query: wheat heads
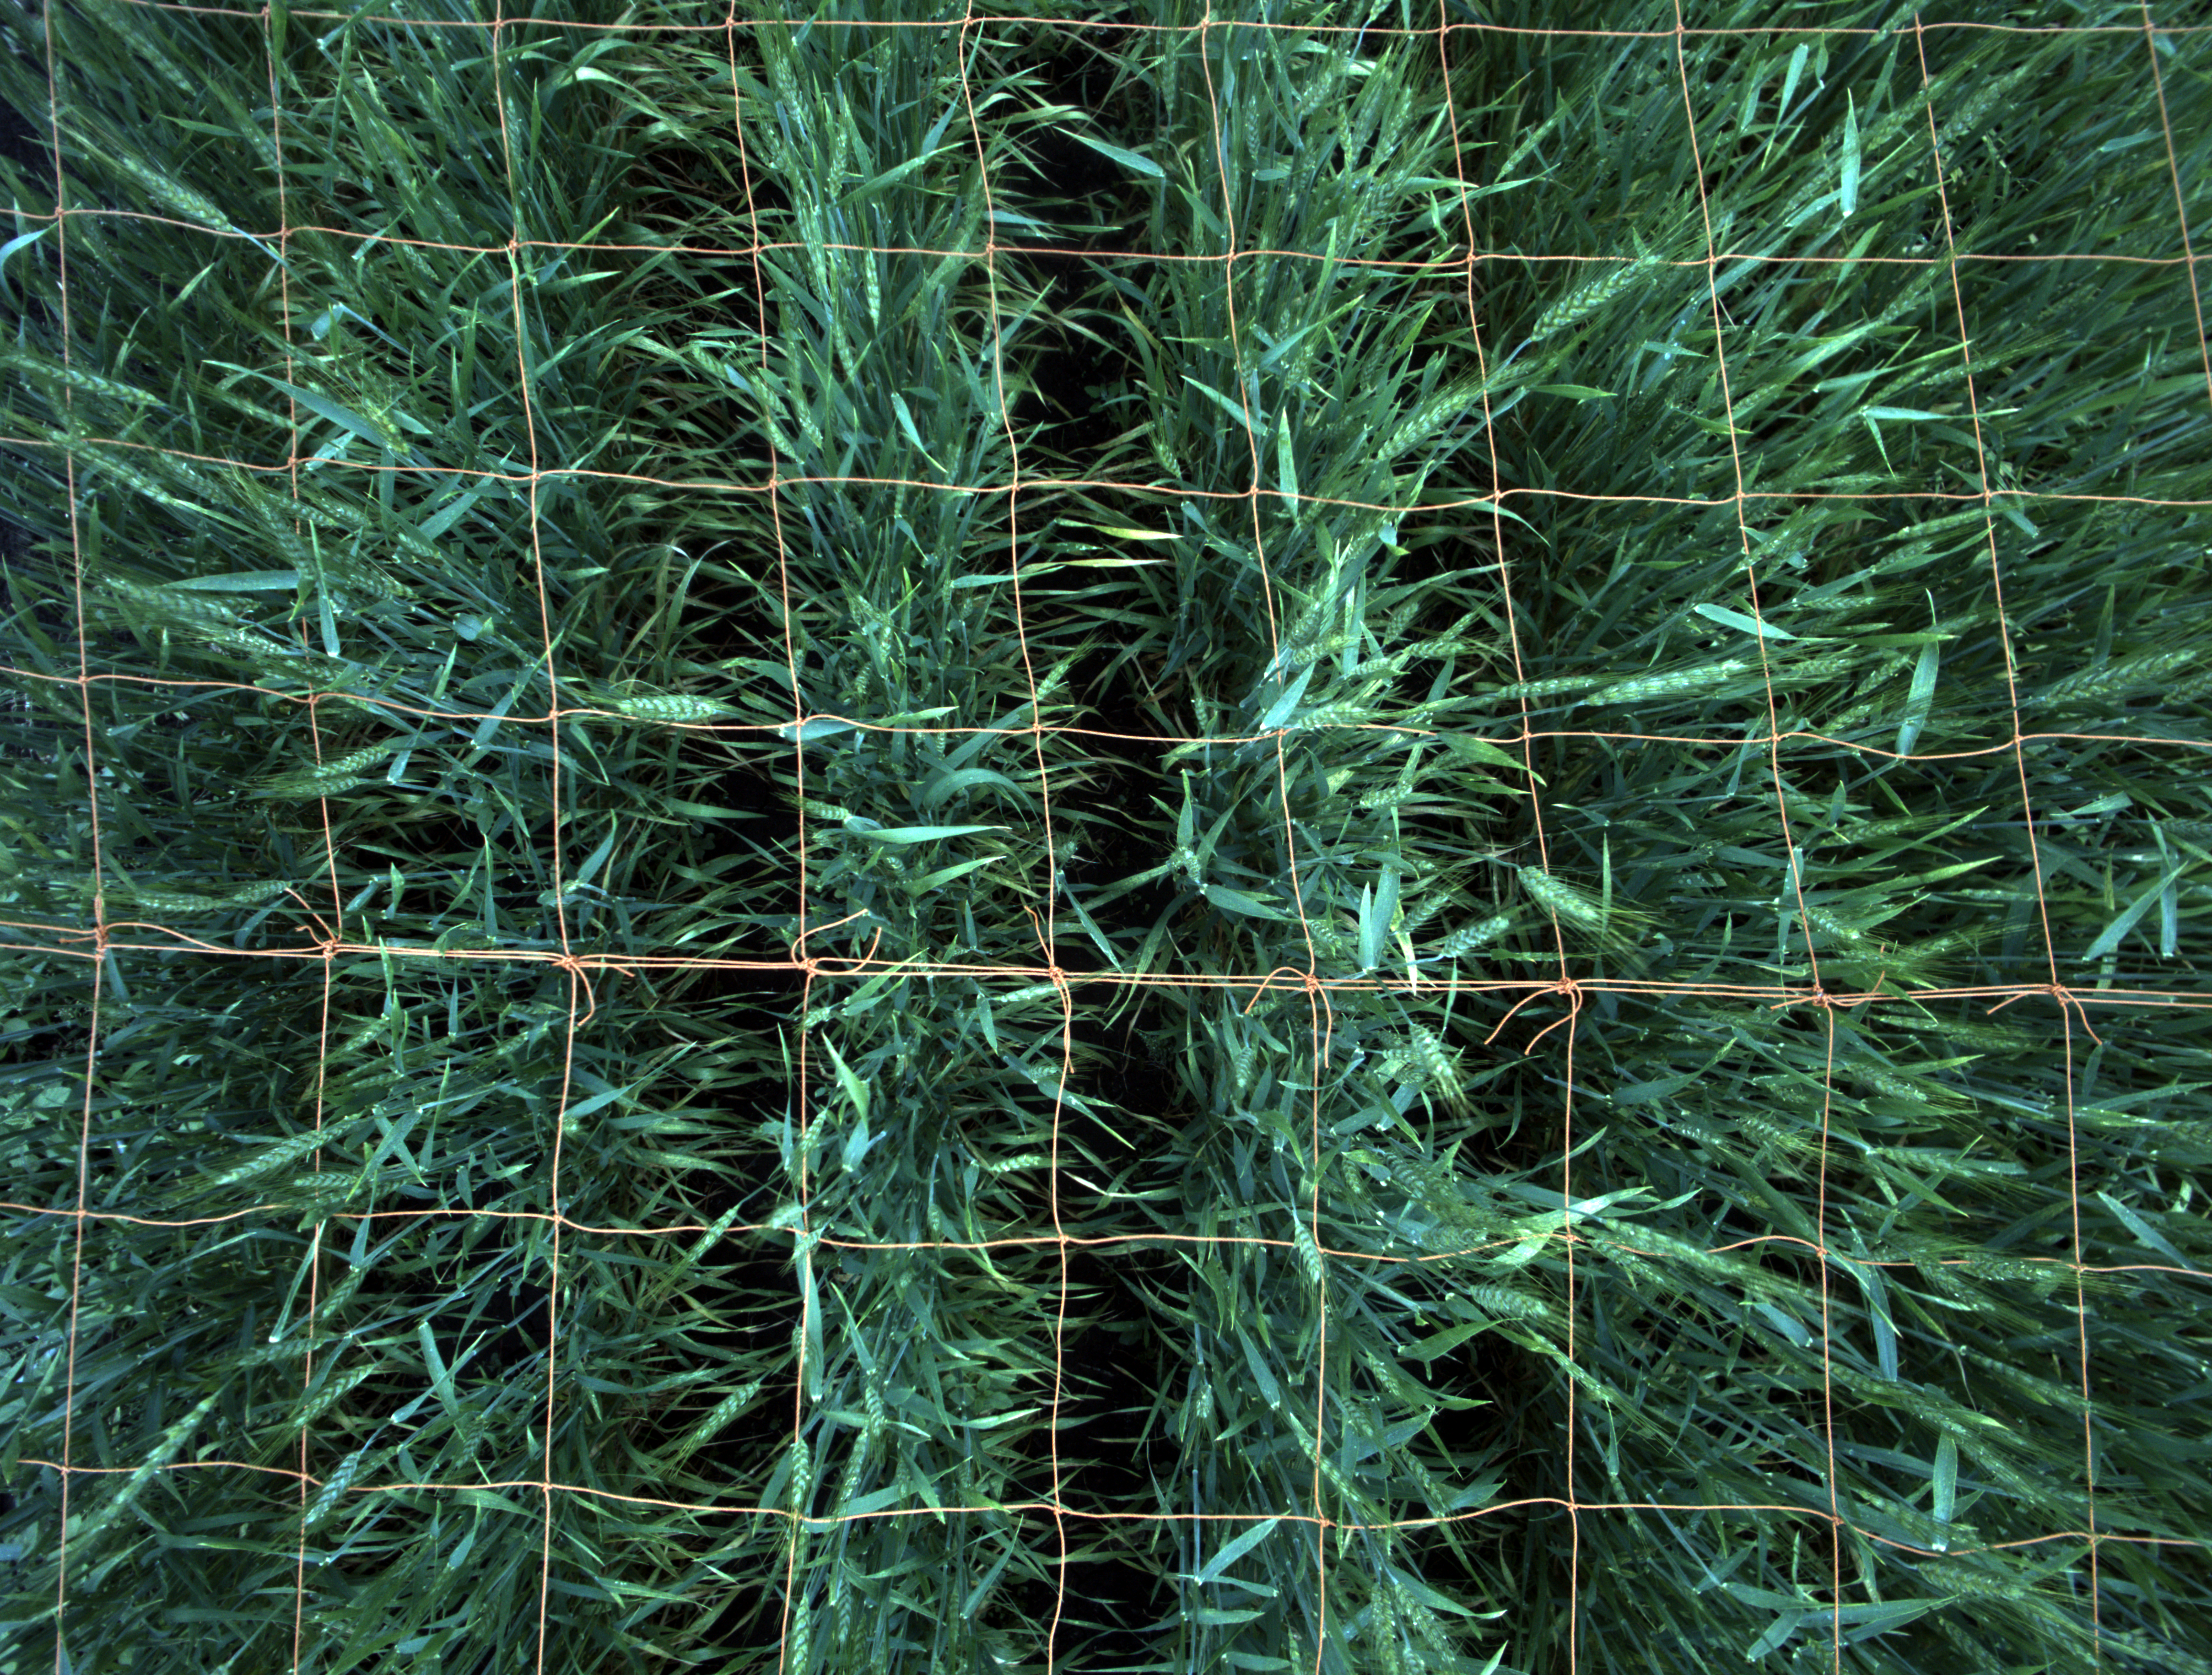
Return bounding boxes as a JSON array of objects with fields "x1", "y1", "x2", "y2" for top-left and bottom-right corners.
[
  {"x1": 1284, "y1": 1630, "x2": 1306, "y2": 1675},
  {"x1": 263, "y1": 332, "x2": 329, "y2": 371},
  {"x1": 1422, "y1": 1224, "x2": 1469, "y2": 1254},
  {"x1": 345, "y1": 1015, "x2": 392, "y2": 1055},
  {"x1": 95, "y1": 1397, "x2": 219, "y2": 1527},
  {"x1": 944, "y1": 446, "x2": 959, "y2": 493},
  {"x1": 1223, "y1": 162, "x2": 1238, "y2": 226},
  {"x1": 91, "y1": 1001, "x2": 135, "y2": 1024},
  {"x1": 1820, "y1": 111, "x2": 1849, "y2": 154},
  {"x1": 770, "y1": 1200, "x2": 802, "y2": 1229},
  {"x1": 1818, "y1": 818, "x2": 1919, "y2": 853},
  {"x1": 884, "y1": 856, "x2": 907, "y2": 885},
  {"x1": 1856, "y1": 658, "x2": 1910, "y2": 695},
  {"x1": 959, "y1": 1463, "x2": 975, "y2": 1495},
  {"x1": 1393, "y1": 1063, "x2": 1425, "y2": 1085},
  {"x1": 1157, "y1": 36, "x2": 1179, "y2": 114},
  {"x1": 1936, "y1": 74, "x2": 2029, "y2": 149},
  {"x1": 1847, "y1": 1063, "x2": 1928, "y2": 1108},
  {"x1": 499, "y1": 634, "x2": 530, "y2": 664},
  {"x1": 935, "y1": 733, "x2": 944, "y2": 761},
  {"x1": 1614, "y1": 1481, "x2": 1638, "y2": 1534},
  {"x1": 332, "y1": 504, "x2": 372, "y2": 533},
  {"x1": 1738, "y1": 1321, "x2": 1807, "y2": 1377},
  {"x1": 44, "y1": 687, "x2": 86, "y2": 725},
  {"x1": 873, "y1": 1639, "x2": 887, "y2": 1675},
  {"x1": 503, "y1": 96, "x2": 525, "y2": 169},
  {"x1": 49, "y1": 62, "x2": 71, "y2": 105},
  {"x1": 1591, "y1": 1238, "x2": 1667, "y2": 1294},
  {"x1": 1794, "y1": 659, "x2": 1856, "y2": 680},
  {"x1": 323, "y1": 261, "x2": 372, "y2": 324},
  {"x1": 1184, "y1": 272, "x2": 1204, "y2": 340},
  {"x1": 781, "y1": 305, "x2": 801, "y2": 334},
  {"x1": 491, "y1": 469, "x2": 517, "y2": 495},
  {"x1": 351, "y1": 1446, "x2": 399, "y2": 1478},
  {"x1": 239, "y1": 126, "x2": 282, "y2": 174},
  {"x1": 995, "y1": 983, "x2": 1055, "y2": 1003},
  {"x1": 350, "y1": 1074, "x2": 407, "y2": 1088},
  {"x1": 691, "y1": 346, "x2": 730, "y2": 381},
  {"x1": 748, "y1": 375, "x2": 787, "y2": 419},
  {"x1": 291, "y1": 1193, "x2": 350, "y2": 1215},
  {"x1": 762, "y1": 122, "x2": 781, "y2": 157},
  {"x1": 2162, "y1": 673, "x2": 2212, "y2": 706},
  {"x1": 371, "y1": 407, "x2": 412, "y2": 458},
  {"x1": 1621, "y1": 819, "x2": 1656, "y2": 833},
  {"x1": 356, "y1": 366, "x2": 376, "y2": 388},
  {"x1": 1385, "y1": 1150, "x2": 1422, "y2": 1195},
  {"x1": 1306, "y1": 919, "x2": 1342, "y2": 948},
  {"x1": 1760, "y1": 792, "x2": 1809, "y2": 807},
  {"x1": 942, "y1": 649, "x2": 954, "y2": 667},
  {"x1": 1299, "y1": 151, "x2": 1315, "y2": 195},
  {"x1": 1341, "y1": 1156, "x2": 1363, "y2": 1193},
  {"x1": 254, "y1": 500, "x2": 315, "y2": 584},
  {"x1": 346, "y1": 1057, "x2": 392, "y2": 1078},
  {"x1": 1918, "y1": 1569, "x2": 2023, "y2": 1602},
  {"x1": 879, "y1": 626, "x2": 893, "y2": 667},
  {"x1": 105, "y1": 578, "x2": 241, "y2": 625},
  {"x1": 134, "y1": 891, "x2": 217, "y2": 916},
  {"x1": 926, "y1": 1201, "x2": 940, "y2": 1233},
  {"x1": 918, "y1": 307, "x2": 928, "y2": 338},
  {"x1": 892, "y1": 1457, "x2": 911, "y2": 1486},
  {"x1": 1342, "y1": 1393, "x2": 1372, "y2": 1437},
  {"x1": 1293, "y1": 1224, "x2": 1324, "y2": 1291},
  {"x1": 1441, "y1": 916, "x2": 1508, "y2": 959},
  {"x1": 1921, "y1": 615, "x2": 1981, "y2": 638},
  {"x1": 1913, "y1": 1254, "x2": 1995, "y2": 1310},
  {"x1": 1411, "y1": 1022, "x2": 1451, "y2": 1080},
  {"x1": 1211, "y1": 1255, "x2": 1230, "y2": 1299},
  {"x1": 827, "y1": 134, "x2": 848, "y2": 206},
  {"x1": 837, "y1": 1580, "x2": 851, "y2": 1646},
  {"x1": 1357, "y1": 181, "x2": 1394, "y2": 234},
  {"x1": 357, "y1": 1180, "x2": 406, "y2": 1212},
  {"x1": 1414, "y1": 1161, "x2": 1453, "y2": 1201},
  {"x1": 1183, "y1": 850, "x2": 1201, "y2": 883},
  {"x1": 1366, "y1": 1351, "x2": 1401, "y2": 1399},
  {"x1": 1395, "y1": 894, "x2": 1451, "y2": 935},
  {"x1": 1809, "y1": 907, "x2": 1862, "y2": 946},
  {"x1": 965, "y1": 176, "x2": 985, "y2": 224},
  {"x1": 615, "y1": 693, "x2": 723, "y2": 724},
  {"x1": 799, "y1": 487, "x2": 813, "y2": 512},
  {"x1": 890, "y1": 764, "x2": 912, "y2": 779},
  {"x1": 543, "y1": 1255, "x2": 566, "y2": 1280},
  {"x1": 1338, "y1": 4, "x2": 1365, "y2": 58},
  {"x1": 1668, "y1": 436, "x2": 1711, "y2": 469},
  {"x1": 1193, "y1": 1385, "x2": 1211, "y2": 1421},
  {"x1": 1804, "y1": 1640, "x2": 1847, "y2": 1671},
  {"x1": 381, "y1": 1545, "x2": 416, "y2": 1584},
  {"x1": 874, "y1": 44, "x2": 893, "y2": 93},
  {"x1": 474, "y1": 1593, "x2": 501, "y2": 1647},
  {"x1": 346, "y1": 572, "x2": 381, "y2": 601},
  {"x1": 268, "y1": 494, "x2": 332, "y2": 532},
  {"x1": 1247, "y1": 1001, "x2": 1279, "y2": 1022},
  {"x1": 1373, "y1": 101, "x2": 1412, "y2": 170},
  {"x1": 1359, "y1": 781, "x2": 1413, "y2": 810},
  {"x1": 161, "y1": 452, "x2": 237, "y2": 510},
  {"x1": 292, "y1": 1170, "x2": 356, "y2": 1191},
  {"x1": 1403, "y1": 639, "x2": 1467, "y2": 656},
  {"x1": 956, "y1": 944, "x2": 973, "y2": 958},
  {"x1": 399, "y1": 532, "x2": 438, "y2": 561},
  {"x1": 778, "y1": 52, "x2": 815, "y2": 130},
  {"x1": 1818, "y1": 1357, "x2": 1887, "y2": 1401},
  {"x1": 457, "y1": 1418, "x2": 485, "y2": 1466},
  {"x1": 1584, "y1": 661, "x2": 1751, "y2": 706},
  {"x1": 792, "y1": 1532, "x2": 812, "y2": 1588},
  {"x1": 1499, "y1": 673, "x2": 1606, "y2": 703},
  {"x1": 2122, "y1": 1633, "x2": 2211, "y2": 1670},
  {"x1": 320, "y1": 744, "x2": 391, "y2": 772},
  {"x1": 376, "y1": 271, "x2": 419, "y2": 325},
  {"x1": 841, "y1": 495, "x2": 864, "y2": 531},
  {"x1": 765, "y1": 419, "x2": 804, "y2": 465},
  {"x1": 1807, "y1": 473, "x2": 1881, "y2": 492},
  {"x1": 79, "y1": 209, "x2": 114, "y2": 279},
  {"x1": 472, "y1": 1212, "x2": 490, "y2": 1231},
  {"x1": 1899, "y1": 1386, "x2": 1966, "y2": 1437},
  {"x1": 1766, "y1": 1079, "x2": 1812, "y2": 1109},
  {"x1": 1287, "y1": 601, "x2": 1323, "y2": 652},
  {"x1": 1277, "y1": 308, "x2": 1287, "y2": 345},
  {"x1": 1374, "y1": 1591, "x2": 1399, "y2": 1673},
  {"x1": 1189, "y1": 698, "x2": 1209, "y2": 732},
  {"x1": 792, "y1": 47, "x2": 810, "y2": 89},
  {"x1": 418, "y1": 93, "x2": 465, "y2": 158},
  {"x1": 741, "y1": 126, "x2": 765, "y2": 163},
  {"x1": 1957, "y1": 887, "x2": 2014, "y2": 904},
  {"x1": 656, "y1": 1122, "x2": 690, "y2": 1136},
  {"x1": 785, "y1": 345, "x2": 802, "y2": 398},
  {"x1": 1376, "y1": 1030, "x2": 1412, "y2": 1049},
  {"x1": 1239, "y1": 348, "x2": 1253, "y2": 396},
  {"x1": 1335, "y1": 104, "x2": 1354, "y2": 158},
  {"x1": 795, "y1": 1226, "x2": 826, "y2": 1259},
  {"x1": 1519, "y1": 866, "x2": 1600, "y2": 924},
  {"x1": 207, "y1": 1664, "x2": 231, "y2": 1675},
  {"x1": 786, "y1": 253, "x2": 804, "y2": 290},
  {"x1": 775, "y1": 1525, "x2": 790, "y2": 1583},
  {"x1": 790, "y1": 1595, "x2": 812, "y2": 1674},
  {"x1": 403, "y1": 244, "x2": 439, "y2": 281},
  {"x1": 1486, "y1": 362, "x2": 1544, "y2": 389},
  {"x1": 229, "y1": 629, "x2": 298, "y2": 669},
  {"x1": 1871, "y1": 543, "x2": 1931, "y2": 573},
  {"x1": 1439, "y1": 611, "x2": 1474, "y2": 636},
  {"x1": 1354, "y1": 91, "x2": 1379, "y2": 153},
  {"x1": 1037, "y1": 662, "x2": 1071, "y2": 702},
  {"x1": 1306, "y1": 938, "x2": 1327, "y2": 960},
  {"x1": 958, "y1": 596, "x2": 976, "y2": 619},
  {"x1": 423, "y1": 1034, "x2": 451, "y2": 1053},
  {"x1": 791, "y1": 195, "x2": 819, "y2": 272},
  {"x1": 1860, "y1": 83, "x2": 1933, "y2": 152},
  {"x1": 9, "y1": 354, "x2": 170, "y2": 412},
  {"x1": 1360, "y1": 344, "x2": 1383, "y2": 393},
  {"x1": 1812, "y1": 703, "x2": 1874, "y2": 742},
  {"x1": 1433, "y1": 749, "x2": 1475, "y2": 772},
  {"x1": 1880, "y1": 280, "x2": 1934, "y2": 330},
  {"x1": 405, "y1": 0, "x2": 446, "y2": 62},
  {"x1": 791, "y1": 1442, "x2": 814, "y2": 1512},
  {"x1": 805, "y1": 263, "x2": 819, "y2": 302},
  {"x1": 943, "y1": 580, "x2": 953, "y2": 609},
  {"x1": 431, "y1": 1563, "x2": 453, "y2": 1606},
  {"x1": 805, "y1": 1106, "x2": 830, "y2": 1147},
  {"x1": 1673, "y1": 582, "x2": 1724, "y2": 615},
  {"x1": 231, "y1": 880, "x2": 294, "y2": 907},
  {"x1": 1887, "y1": 1149, "x2": 1969, "y2": 1180},
  {"x1": 1440, "y1": 1201, "x2": 1517, "y2": 1235},
  {"x1": 583, "y1": 1387, "x2": 603, "y2": 1422},
  {"x1": 1963, "y1": 1442, "x2": 2026, "y2": 1489},
  {"x1": 1302, "y1": 488, "x2": 1333, "y2": 528},
  {"x1": 467, "y1": 1535, "x2": 492, "y2": 1568},
  {"x1": 48, "y1": 7, "x2": 95, "y2": 63},
  {"x1": 857, "y1": 594, "x2": 877, "y2": 623},
  {"x1": 1404, "y1": 1650, "x2": 1428, "y2": 1674},
  {"x1": 863, "y1": 249, "x2": 882, "y2": 328},
  {"x1": 794, "y1": 398, "x2": 823, "y2": 450},
  {"x1": 812, "y1": 834, "x2": 834, "y2": 850},
  {"x1": 562, "y1": 877, "x2": 580, "y2": 894},
  {"x1": 1359, "y1": 243, "x2": 1374, "y2": 286},
  {"x1": 433, "y1": 197, "x2": 461, "y2": 224},
  {"x1": 2041, "y1": 647, "x2": 2200, "y2": 712},
  {"x1": 902, "y1": 267, "x2": 944, "y2": 316},
  {"x1": 837, "y1": 1433, "x2": 872, "y2": 1503},
  {"x1": 1670, "y1": 1123, "x2": 1721, "y2": 1153},
  {"x1": 560, "y1": 1115, "x2": 580, "y2": 1136},
  {"x1": 922, "y1": 680, "x2": 933, "y2": 696},
  {"x1": 1863, "y1": 1248, "x2": 1928, "y2": 1267},
  {"x1": 1792, "y1": 615, "x2": 1854, "y2": 638},
  {"x1": 953, "y1": 223, "x2": 976, "y2": 259},
  {"x1": 1538, "y1": 1335, "x2": 1612, "y2": 1401},
  {"x1": 216, "y1": 595, "x2": 265, "y2": 615},
  {"x1": 947, "y1": 1590, "x2": 961, "y2": 1653},
  {"x1": 1705, "y1": 1473, "x2": 1774, "y2": 1537},
  {"x1": 1964, "y1": 1253, "x2": 2050, "y2": 1286},
  {"x1": 807, "y1": 801, "x2": 850, "y2": 822},
  {"x1": 1925, "y1": 360, "x2": 2008, "y2": 392},
  {"x1": 1343, "y1": 657, "x2": 1391, "y2": 677},
  {"x1": 512, "y1": 206, "x2": 537, "y2": 280},
  {"x1": 1369, "y1": 0, "x2": 1387, "y2": 22},
  {"x1": 1244, "y1": 93, "x2": 1261, "y2": 161},
  {"x1": 773, "y1": 154, "x2": 807, "y2": 192},
  {"x1": 288, "y1": 774, "x2": 361, "y2": 802},
  {"x1": 306, "y1": 1452, "x2": 358, "y2": 1527},
  {"x1": 855, "y1": 661, "x2": 876, "y2": 701},
  {"x1": 898, "y1": 1269, "x2": 914, "y2": 1290},
  {"x1": 1742, "y1": 525, "x2": 1792, "y2": 575},
  {"x1": 1234, "y1": 1046, "x2": 1258, "y2": 1089},
  {"x1": 1513, "y1": 949, "x2": 1575, "y2": 964},
  {"x1": 1599, "y1": 1215, "x2": 1747, "y2": 1283},
  {"x1": 1030, "y1": 1065, "x2": 1060, "y2": 1079},
  {"x1": 988, "y1": 1154, "x2": 1038, "y2": 1175},
  {"x1": 1383, "y1": 601, "x2": 1421, "y2": 645},
  {"x1": 122, "y1": 153, "x2": 229, "y2": 234},
  {"x1": 297, "y1": 220, "x2": 364, "y2": 294},
  {"x1": 915, "y1": 37, "x2": 928, "y2": 80},
  {"x1": 894, "y1": 478, "x2": 907, "y2": 524},
  {"x1": 834, "y1": 324, "x2": 855, "y2": 387},
  {"x1": 2162, "y1": 819, "x2": 2209, "y2": 839},
  {"x1": 891, "y1": 1054, "x2": 906, "y2": 1079},
  {"x1": 48, "y1": 385, "x2": 80, "y2": 435},
  {"x1": 507, "y1": 1395, "x2": 536, "y2": 1434},
  {"x1": 373, "y1": 365, "x2": 395, "y2": 388},
  {"x1": 1383, "y1": 1050, "x2": 1415, "y2": 1062},
  {"x1": 1741, "y1": 1118, "x2": 1797, "y2": 1156},
  {"x1": 482, "y1": 262, "x2": 498, "y2": 282},
  {"x1": 915, "y1": 948, "x2": 929, "y2": 972},
  {"x1": 1853, "y1": 1197, "x2": 1895, "y2": 1224},
  {"x1": 643, "y1": 1149, "x2": 719, "y2": 1174},
  {"x1": 1398, "y1": 1582, "x2": 1457, "y2": 1656},
  {"x1": 107, "y1": 15, "x2": 194, "y2": 96},
  {"x1": 1941, "y1": 1619, "x2": 2004, "y2": 1670},
  {"x1": 1297, "y1": 86, "x2": 1333, "y2": 117},
  {"x1": 1373, "y1": 395, "x2": 1469, "y2": 462},
  {"x1": 1286, "y1": 345, "x2": 1315, "y2": 390},
  {"x1": 792, "y1": 1326, "x2": 812, "y2": 1370},
  {"x1": 2022, "y1": 1609, "x2": 2094, "y2": 1665},
  {"x1": 1404, "y1": 858, "x2": 1439, "y2": 874},
  {"x1": 1770, "y1": 534, "x2": 1801, "y2": 579},
  {"x1": 1319, "y1": 1171, "x2": 1341, "y2": 1198},
  {"x1": 1986, "y1": 1473, "x2": 2087, "y2": 1505},
  {"x1": 1788, "y1": 163, "x2": 1837, "y2": 207},
  {"x1": 1844, "y1": 951, "x2": 1896, "y2": 969},
  {"x1": 380, "y1": 576, "x2": 417, "y2": 600},
  {"x1": 774, "y1": 76, "x2": 799, "y2": 122},
  {"x1": 1860, "y1": 372, "x2": 1930, "y2": 402},
  {"x1": 297, "y1": 1362, "x2": 376, "y2": 1419},
  {"x1": 1893, "y1": 936, "x2": 1952, "y2": 963},
  {"x1": 1158, "y1": 445, "x2": 1183, "y2": 484},
  {"x1": 790, "y1": 651, "x2": 804, "y2": 681},
  {"x1": 1700, "y1": 1008, "x2": 1750, "y2": 1032},
  {"x1": 366, "y1": 117, "x2": 413, "y2": 193},
  {"x1": 2170, "y1": 1117, "x2": 2211, "y2": 1143},
  {"x1": 1532, "y1": 279, "x2": 1640, "y2": 339},
  {"x1": 914, "y1": 860, "x2": 927, "y2": 882},
  {"x1": 261, "y1": 40, "x2": 301, "y2": 96},
  {"x1": 1054, "y1": 841, "x2": 1076, "y2": 871},
  {"x1": 405, "y1": 1540, "x2": 433, "y2": 1580},
  {"x1": 1292, "y1": 634, "x2": 1351, "y2": 664},
  {"x1": 124, "y1": 1092, "x2": 166, "y2": 1107},
  {"x1": 1756, "y1": 312, "x2": 1794, "y2": 345},
  {"x1": 1862, "y1": 1489, "x2": 1967, "y2": 1546},
  {"x1": 1348, "y1": 535, "x2": 1367, "y2": 561},
  {"x1": 1325, "y1": 414, "x2": 1354, "y2": 444},
  {"x1": 1795, "y1": 591, "x2": 1875, "y2": 612},
  {"x1": 798, "y1": 1005, "x2": 832, "y2": 1031},
  {"x1": 48, "y1": 434, "x2": 173, "y2": 505},
  {"x1": 493, "y1": 1031, "x2": 530, "y2": 1057},
  {"x1": 1289, "y1": 1415, "x2": 1357, "y2": 1505},
  {"x1": 320, "y1": 145, "x2": 363, "y2": 192},
  {"x1": 850, "y1": 1614, "x2": 871, "y2": 1674},
  {"x1": 1293, "y1": 697, "x2": 1362, "y2": 735},
  {"x1": 1975, "y1": 1348, "x2": 2082, "y2": 1409},
  {"x1": 690, "y1": 1205, "x2": 740, "y2": 1266},
  {"x1": 1469, "y1": 1286, "x2": 1550, "y2": 1322},
  {"x1": 865, "y1": 1386, "x2": 884, "y2": 1427},
  {"x1": 1881, "y1": 1016, "x2": 1972, "y2": 1040},
  {"x1": 847, "y1": 599, "x2": 861, "y2": 626},
  {"x1": 337, "y1": 327, "x2": 364, "y2": 360},
  {"x1": 1249, "y1": 237, "x2": 1267, "y2": 305},
  {"x1": 404, "y1": 126, "x2": 430, "y2": 157},
  {"x1": 233, "y1": 1339, "x2": 325, "y2": 1366},
  {"x1": 321, "y1": 1268, "x2": 367, "y2": 1321},
  {"x1": 2150, "y1": 344, "x2": 2209, "y2": 375},
  {"x1": 1951, "y1": 1037, "x2": 2025, "y2": 1054},
  {"x1": 1732, "y1": 384, "x2": 1780, "y2": 411},
  {"x1": 283, "y1": 660, "x2": 340, "y2": 686},
  {"x1": 1896, "y1": 505, "x2": 1987, "y2": 535},
  {"x1": 985, "y1": 390, "x2": 1019, "y2": 440},
  {"x1": 1665, "y1": 362, "x2": 1689, "y2": 404},
  {"x1": 212, "y1": 1125, "x2": 353, "y2": 1187},
  {"x1": 878, "y1": 201, "x2": 893, "y2": 244},
  {"x1": 1335, "y1": 230, "x2": 1343, "y2": 268},
  {"x1": 1240, "y1": 1225, "x2": 1262, "y2": 1254},
  {"x1": 509, "y1": 1004, "x2": 546, "y2": 1020},
  {"x1": 1404, "y1": 1452, "x2": 1443, "y2": 1507},
  {"x1": 692, "y1": 1381, "x2": 762, "y2": 1450},
  {"x1": 222, "y1": 395, "x2": 300, "y2": 433},
  {"x1": 647, "y1": 1370, "x2": 713, "y2": 1393},
  {"x1": 421, "y1": 416, "x2": 463, "y2": 447}
]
